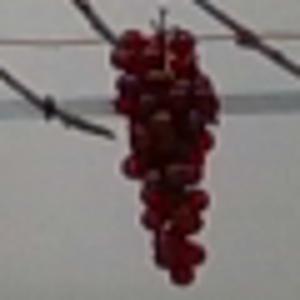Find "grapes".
Returning a JSON list of instances; mask_svg holds the SVG:
<instances>
[{
  "label": "grapes",
  "mask_w": 300,
  "mask_h": 300,
  "mask_svg": "<svg viewBox=\"0 0 300 300\" xmlns=\"http://www.w3.org/2000/svg\"><path fill=\"white\" fill-rule=\"evenodd\" d=\"M198 40L185 28L161 30L151 36L135 28L121 32L108 55L115 81L113 108L128 119L130 155L120 171L140 180V215L152 232L156 269L169 272L173 285L186 288L205 265L208 252L190 237L205 227L202 214L211 198L195 188L204 178L205 154L215 138L206 123L218 115L217 86L202 72Z\"/></svg>",
  "instance_id": "1"
}]
</instances>
